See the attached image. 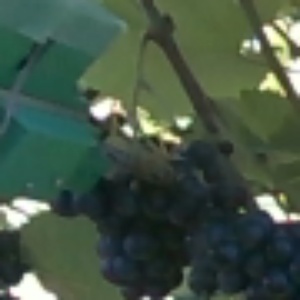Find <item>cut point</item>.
Segmentation results:
<instances>
[{"label":"cut point","mask_w":300,"mask_h":300,"mask_svg":"<svg viewBox=\"0 0 300 300\" xmlns=\"http://www.w3.org/2000/svg\"><path fill=\"white\" fill-rule=\"evenodd\" d=\"M151 46L150 33L147 28L143 33L140 41V45L137 49L136 59L134 63L133 79L129 85V89L126 91V121L130 124L133 130V136L135 138L136 150L133 158L126 164V169L129 172L135 168L138 163L139 168L143 174H151V169L146 165L145 159L143 158L144 144H146L151 150L162 155L164 158H168L171 153L168 150L160 147L153 141H151L145 134L140 133V125L136 121L135 105H136V94L140 88L142 77L144 73V65L147 60L148 51Z\"/></svg>","instance_id":"6a23745f"}]
</instances>
